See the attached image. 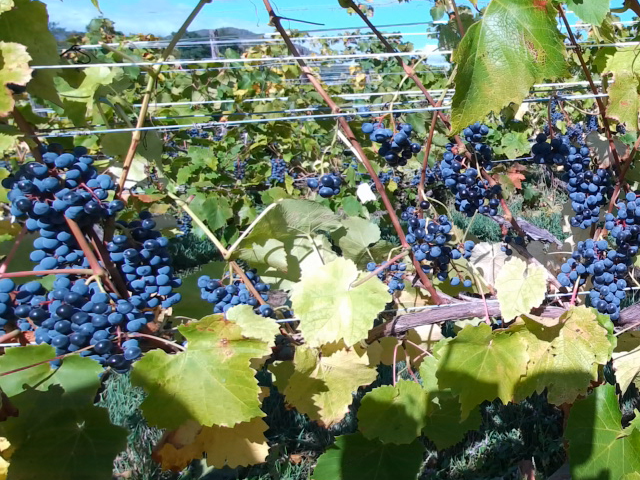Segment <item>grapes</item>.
Wrapping results in <instances>:
<instances>
[{"label": "grapes", "instance_id": "obj_1", "mask_svg": "<svg viewBox=\"0 0 640 480\" xmlns=\"http://www.w3.org/2000/svg\"><path fill=\"white\" fill-rule=\"evenodd\" d=\"M127 242L126 235H116L106 245L113 264L125 263L120 271L131 294L127 300L119 299L115 292L101 293L96 281H70V273H55L54 289L45 295H35L42 288L39 280L15 284L12 278H1L0 337L7 335L5 324H12L20 332L32 331L36 344H51L57 356L86 348L80 357L89 356L117 374L128 372L142 348L137 339L124 340L122 347L112 343L116 325L129 335H138L155 319L153 311L141 313L140 308L161 305L169 309L178 304L182 295L172 288H180L182 280L172 277L174 268L169 266L172 258L168 254L152 256L151 251L167 246V236L144 240L139 251L121 250V244Z\"/></svg>", "mask_w": 640, "mask_h": 480}, {"label": "grapes", "instance_id": "obj_2", "mask_svg": "<svg viewBox=\"0 0 640 480\" xmlns=\"http://www.w3.org/2000/svg\"><path fill=\"white\" fill-rule=\"evenodd\" d=\"M39 150L43 163L28 161L2 180L4 189H12L7 193L13 204L9 212L26 220L29 231H38L29 253L31 262H39L33 271L88 268V257L78 248L66 219L101 213L99 201L85 189H77L78 184L85 182L99 200H106L115 182L110 175L98 174V167L92 165L94 158L84 145H76L69 153L63 152L59 143L41 142ZM50 163L55 169L69 168L65 187L57 177L48 176L46 164Z\"/></svg>", "mask_w": 640, "mask_h": 480}, {"label": "grapes", "instance_id": "obj_3", "mask_svg": "<svg viewBox=\"0 0 640 480\" xmlns=\"http://www.w3.org/2000/svg\"><path fill=\"white\" fill-rule=\"evenodd\" d=\"M626 203H616L617 216L625 219L627 225H614L615 219L612 212L605 214V228L610 230L613 237H617L616 244L621 247L617 251H609L606 258L599 257L598 249L606 251L608 241L594 238L580 240L576 251L571 253L567 263L561 265V271L557 274V281L562 287L571 288L580 276L578 284L583 285L586 278L591 277V283L596 289H590L588 298L591 306L599 312H608L612 320L619 318L621 300L625 298L627 281L614 276L625 273L632 264V257L640 250V226L633 224L635 216L640 217V197L634 192L625 195Z\"/></svg>", "mask_w": 640, "mask_h": 480}, {"label": "grapes", "instance_id": "obj_4", "mask_svg": "<svg viewBox=\"0 0 640 480\" xmlns=\"http://www.w3.org/2000/svg\"><path fill=\"white\" fill-rule=\"evenodd\" d=\"M536 143L532 147L537 164L555 163L565 165L566 173L563 181L567 184L572 200L571 207L576 213L569 219V225L573 228L586 229L592 223L599 221L600 206L606 203L604 193L609 190L611 180L606 169H598L595 173L588 171L590 149L586 145L575 147L570 145V136L562 134L554 137L551 145L545 143L547 135L538 133Z\"/></svg>", "mask_w": 640, "mask_h": 480}, {"label": "grapes", "instance_id": "obj_5", "mask_svg": "<svg viewBox=\"0 0 640 480\" xmlns=\"http://www.w3.org/2000/svg\"><path fill=\"white\" fill-rule=\"evenodd\" d=\"M416 208L414 206H408L406 211L401 214V219L407 221V234L405 235V241L408 243H415L417 239H421L420 244H414L412 246L413 258L418 261H435L439 265V269L442 272L436 274L438 281H445L448 274L445 270L448 268V262L452 259L464 260L469 259L473 255V249L475 248V242L473 240H466L463 243L465 251L461 253L456 248L443 247L445 242L452 239L450 233L452 232L453 224L449 221L447 214H441L438 217V223L429 221L427 223L426 234V220L424 218H418L414 216Z\"/></svg>", "mask_w": 640, "mask_h": 480}, {"label": "grapes", "instance_id": "obj_6", "mask_svg": "<svg viewBox=\"0 0 640 480\" xmlns=\"http://www.w3.org/2000/svg\"><path fill=\"white\" fill-rule=\"evenodd\" d=\"M455 147L453 142L444 145L443 159L440 161L439 168L442 171L444 186L456 194V211L472 217L478 209L480 214L487 212L491 216L497 214V206L500 201L493 198L501 191L499 185L487 189L488 181L486 179H477L478 170L475 167H469L464 172H459L462 165L459 161L463 159L461 154H453L451 149Z\"/></svg>", "mask_w": 640, "mask_h": 480}, {"label": "grapes", "instance_id": "obj_7", "mask_svg": "<svg viewBox=\"0 0 640 480\" xmlns=\"http://www.w3.org/2000/svg\"><path fill=\"white\" fill-rule=\"evenodd\" d=\"M398 130L393 134L391 129H386V125L382 122H362L360 131L363 134H369V140L373 145L382 143V147L378 150L380 157H385L388 164L392 168L398 165L406 166L408 160L412 159L413 153L421 151V145L418 142H411L410 136L413 125L410 123H398L395 125Z\"/></svg>", "mask_w": 640, "mask_h": 480}, {"label": "grapes", "instance_id": "obj_8", "mask_svg": "<svg viewBox=\"0 0 640 480\" xmlns=\"http://www.w3.org/2000/svg\"><path fill=\"white\" fill-rule=\"evenodd\" d=\"M199 295L208 303H215V313H226L235 305H250L256 307L255 299L246 284L240 280H234L232 285L221 286L220 279H212L209 275H201L197 280Z\"/></svg>", "mask_w": 640, "mask_h": 480}, {"label": "grapes", "instance_id": "obj_9", "mask_svg": "<svg viewBox=\"0 0 640 480\" xmlns=\"http://www.w3.org/2000/svg\"><path fill=\"white\" fill-rule=\"evenodd\" d=\"M309 189H318V194L324 198L338 195L341 191V178L335 174L323 175L321 181L317 177L307 179Z\"/></svg>", "mask_w": 640, "mask_h": 480}, {"label": "grapes", "instance_id": "obj_10", "mask_svg": "<svg viewBox=\"0 0 640 480\" xmlns=\"http://www.w3.org/2000/svg\"><path fill=\"white\" fill-rule=\"evenodd\" d=\"M407 268L405 263L399 264H391L385 268L386 272H394L392 279L388 281V293L393 295L396 290L401 291L405 288V284L401 281L402 276L404 275V270Z\"/></svg>", "mask_w": 640, "mask_h": 480}, {"label": "grapes", "instance_id": "obj_11", "mask_svg": "<svg viewBox=\"0 0 640 480\" xmlns=\"http://www.w3.org/2000/svg\"><path fill=\"white\" fill-rule=\"evenodd\" d=\"M489 128L485 124L476 123L475 125L467 126L463 130L464 139L469 143L478 142L482 140L483 134H488Z\"/></svg>", "mask_w": 640, "mask_h": 480}, {"label": "grapes", "instance_id": "obj_12", "mask_svg": "<svg viewBox=\"0 0 640 480\" xmlns=\"http://www.w3.org/2000/svg\"><path fill=\"white\" fill-rule=\"evenodd\" d=\"M475 147V151L476 152H480L484 157H485V162L483 163L484 166V170L486 171H492L493 170V163L491 161L492 159V149L489 145H483L482 143H475L474 144Z\"/></svg>", "mask_w": 640, "mask_h": 480}, {"label": "grapes", "instance_id": "obj_13", "mask_svg": "<svg viewBox=\"0 0 640 480\" xmlns=\"http://www.w3.org/2000/svg\"><path fill=\"white\" fill-rule=\"evenodd\" d=\"M257 269L252 268L245 272V276L251 281V283L255 286L257 291H267L271 289L270 285H265L264 283H260V276L256 275Z\"/></svg>", "mask_w": 640, "mask_h": 480}]
</instances>
